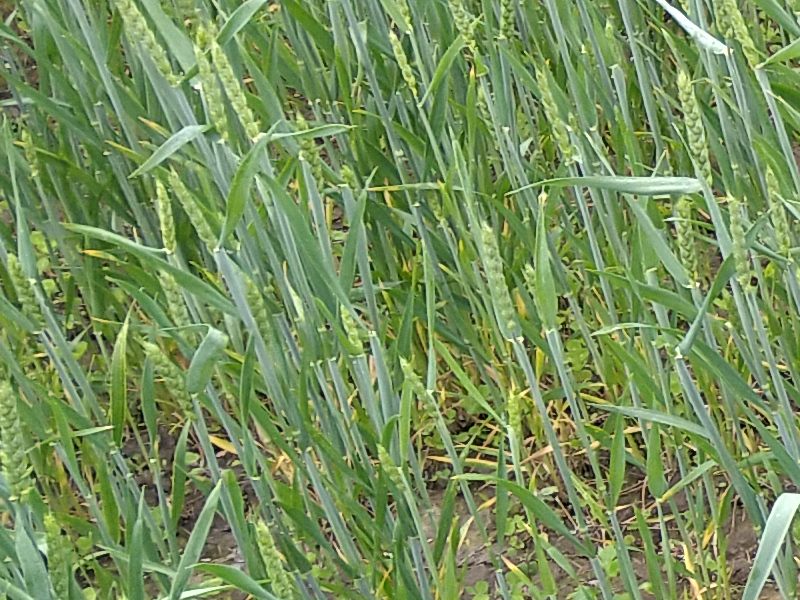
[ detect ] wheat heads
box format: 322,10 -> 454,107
586,38 -> 602,88
376,445 -> 402,490
526,263 -> 538,299
537,67 -> 567,160
196,25 -> 206,46
725,196 -> 750,289
297,112 -> 324,195
478,88 -> 499,148
400,356 -> 440,421
243,275 -> 272,344
154,0 -> 173,15
190,45 -> 226,137
497,0 -> 516,47
106,0 -> 174,85
42,516 -> 72,600
389,30 -> 417,89
676,202 -> 699,280
766,167 -> 793,262
508,389 -> 521,437
0,382 -> 35,499
388,0 -> 408,20
170,172 -> 217,244
342,305 -> 364,351
153,180 -> 176,254
605,22 -> 622,63
716,0 -> 755,66
6,253 -> 46,332
212,41 -> 262,138
678,72 -> 713,190
256,520 -> 295,600
21,129 -> 37,178
156,270 -> 198,351
343,165 -> 362,202
167,0 -> 201,23
483,222 -> 518,339
443,0 -> 474,47
143,339 -> 196,420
